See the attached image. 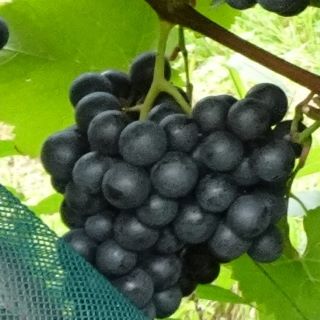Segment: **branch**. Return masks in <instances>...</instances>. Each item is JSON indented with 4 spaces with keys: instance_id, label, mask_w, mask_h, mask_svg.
Returning a JSON list of instances; mask_svg holds the SVG:
<instances>
[{
    "instance_id": "30e6481e",
    "label": "branch",
    "mask_w": 320,
    "mask_h": 320,
    "mask_svg": "<svg viewBox=\"0 0 320 320\" xmlns=\"http://www.w3.org/2000/svg\"><path fill=\"white\" fill-rule=\"evenodd\" d=\"M160 20L193 29L227 48L243 54L303 87L320 94V76L283 60L211 21L189 4L190 0H145Z\"/></svg>"
}]
</instances>
